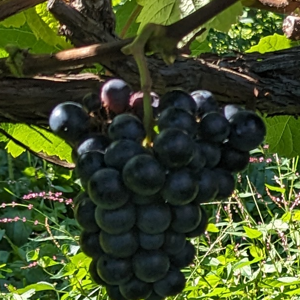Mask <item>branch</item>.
<instances>
[{"label":"branch","mask_w":300,"mask_h":300,"mask_svg":"<svg viewBox=\"0 0 300 300\" xmlns=\"http://www.w3.org/2000/svg\"><path fill=\"white\" fill-rule=\"evenodd\" d=\"M236 2L237 0H211L175 23L153 24L155 30L144 45V54L178 43L194 29L213 19Z\"/></svg>","instance_id":"branch-2"},{"label":"branch","mask_w":300,"mask_h":300,"mask_svg":"<svg viewBox=\"0 0 300 300\" xmlns=\"http://www.w3.org/2000/svg\"><path fill=\"white\" fill-rule=\"evenodd\" d=\"M49 9L63 23L96 44L52 54H27L22 63L24 75L37 76L58 70L91 66L97 62H111L132 55L124 54L122 47L132 42L136 36L122 38L117 32L85 16L66 1L53 0Z\"/></svg>","instance_id":"branch-1"}]
</instances>
